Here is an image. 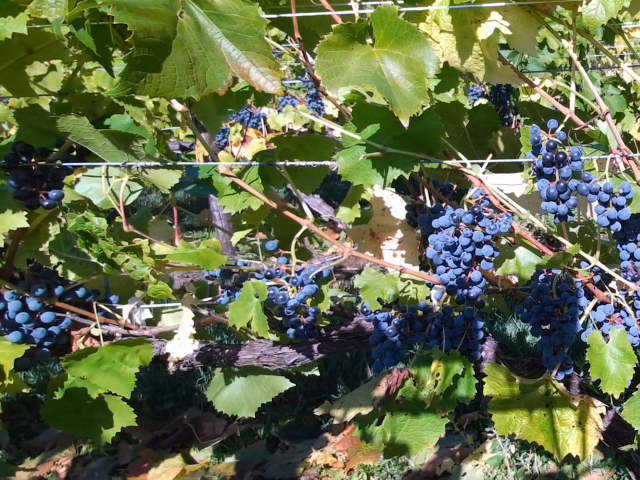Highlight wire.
Segmentation results:
<instances>
[{
  "label": "wire",
  "instance_id": "a73af890",
  "mask_svg": "<svg viewBox=\"0 0 640 480\" xmlns=\"http://www.w3.org/2000/svg\"><path fill=\"white\" fill-rule=\"evenodd\" d=\"M558 0H485L475 3H435L432 5L400 7L402 13H423L437 10H477L498 6H524L556 4Z\"/></svg>",
  "mask_w": 640,
  "mask_h": 480
},
{
  "label": "wire",
  "instance_id": "4f2155b8",
  "mask_svg": "<svg viewBox=\"0 0 640 480\" xmlns=\"http://www.w3.org/2000/svg\"><path fill=\"white\" fill-rule=\"evenodd\" d=\"M373 17V10H308V11H287L282 13H265V20H284L289 18H310V17Z\"/></svg>",
  "mask_w": 640,
  "mask_h": 480
},
{
  "label": "wire",
  "instance_id": "d2f4af69",
  "mask_svg": "<svg viewBox=\"0 0 640 480\" xmlns=\"http://www.w3.org/2000/svg\"><path fill=\"white\" fill-rule=\"evenodd\" d=\"M40 167H75L85 169H113V168H130V167H159L164 168H239L249 166H266V167H285V166H301L315 168H333L335 163L333 161H322L315 159H283V160H268V159H247L237 161H169L165 159L157 160H128V161H111V162H87L77 160H53L45 159L38 162Z\"/></svg>",
  "mask_w": 640,
  "mask_h": 480
},
{
  "label": "wire",
  "instance_id": "f0478fcc",
  "mask_svg": "<svg viewBox=\"0 0 640 480\" xmlns=\"http://www.w3.org/2000/svg\"><path fill=\"white\" fill-rule=\"evenodd\" d=\"M522 161H527L525 157H496V158H473V159H452L449 157H431L423 158L419 161L421 166L433 164H447L450 166H472L475 162H492L499 165L516 164L520 165Z\"/></svg>",
  "mask_w": 640,
  "mask_h": 480
}]
</instances>
